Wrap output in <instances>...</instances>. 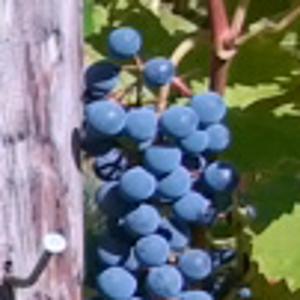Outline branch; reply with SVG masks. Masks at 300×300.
Segmentation results:
<instances>
[{
    "instance_id": "obj_1",
    "label": "branch",
    "mask_w": 300,
    "mask_h": 300,
    "mask_svg": "<svg viewBox=\"0 0 300 300\" xmlns=\"http://www.w3.org/2000/svg\"><path fill=\"white\" fill-rule=\"evenodd\" d=\"M213 58L209 89L216 94L227 90L230 69L236 60V33L224 0H206Z\"/></svg>"
}]
</instances>
